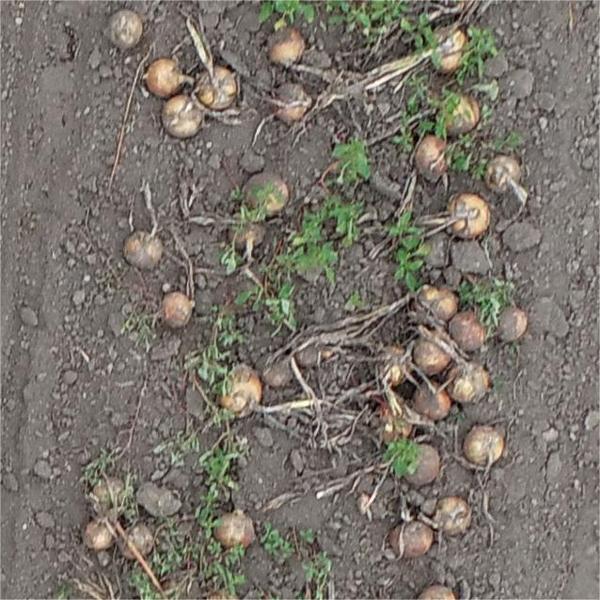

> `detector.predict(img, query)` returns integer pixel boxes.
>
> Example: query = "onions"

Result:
[442,93,482,131]
[122,520,155,554]
[484,153,522,189]
[433,28,467,70]
[266,27,302,64]
[460,425,503,464]
[275,86,307,121]
[159,291,193,325]
[376,402,413,439]
[496,306,527,341]
[418,283,457,318]
[412,137,448,178]
[232,221,267,251]
[432,495,468,533]
[378,350,409,386]
[403,448,440,484]
[146,56,182,94]
[222,366,261,409]
[414,332,452,371]
[242,175,287,218]
[297,340,320,365]
[417,583,456,600]
[163,95,201,135]
[450,365,488,400]
[194,66,237,107]
[449,312,485,350]
[445,192,489,237]
[214,509,252,547]
[84,519,113,550]
[394,522,433,557]
[412,384,449,418]
[123,231,160,268]
[263,359,291,386]
[105,8,142,48]
[93,476,124,501]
